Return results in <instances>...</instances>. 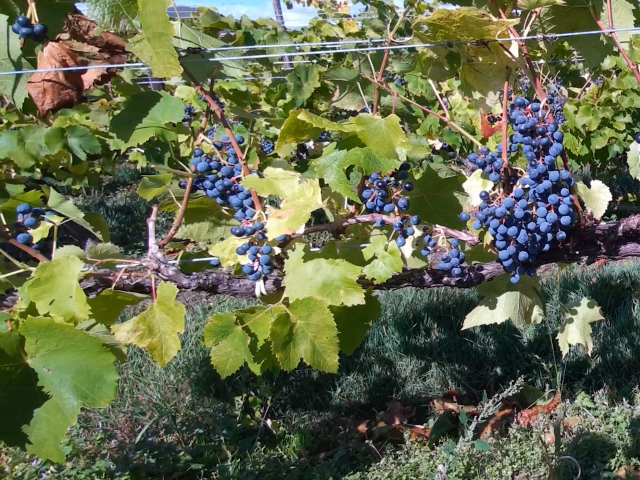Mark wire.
<instances>
[{
    "label": "wire",
    "mask_w": 640,
    "mask_h": 480,
    "mask_svg": "<svg viewBox=\"0 0 640 480\" xmlns=\"http://www.w3.org/2000/svg\"><path fill=\"white\" fill-rule=\"evenodd\" d=\"M387 38H369V39H336L327 41H305L287 44H244L239 46H203V47H185L178 48L177 53L187 52H205V51H241V50H258V49H289L307 46H329L338 44H371V43H387Z\"/></svg>",
    "instance_id": "a73af890"
},
{
    "label": "wire",
    "mask_w": 640,
    "mask_h": 480,
    "mask_svg": "<svg viewBox=\"0 0 640 480\" xmlns=\"http://www.w3.org/2000/svg\"><path fill=\"white\" fill-rule=\"evenodd\" d=\"M143 62H115V63H100V64H86L82 66L68 67V68H39V69H24V70H0V75H27V74H42V73H70L77 71H84L88 69H102V68H118V67H143Z\"/></svg>",
    "instance_id": "4f2155b8"
},
{
    "label": "wire",
    "mask_w": 640,
    "mask_h": 480,
    "mask_svg": "<svg viewBox=\"0 0 640 480\" xmlns=\"http://www.w3.org/2000/svg\"><path fill=\"white\" fill-rule=\"evenodd\" d=\"M610 33H640V28H608V29H592L589 31L581 32H561L551 33L547 35H531L524 37H498V38H485V39H472V40H457L451 42H428L420 44H390L382 47H353V48H333V49H321V50H300L292 52L282 53H258L255 55H228L220 57H193L184 58L180 60L181 64L195 63V62H222L230 60H258L260 58H284L303 55H323V54H335V53H355V52H384L393 49H422L430 47H453L459 45H474V44H487V43H500V42H526L533 40H550L553 38L563 37H583L591 36L594 34H610Z\"/></svg>",
    "instance_id": "d2f4af69"
}]
</instances>
